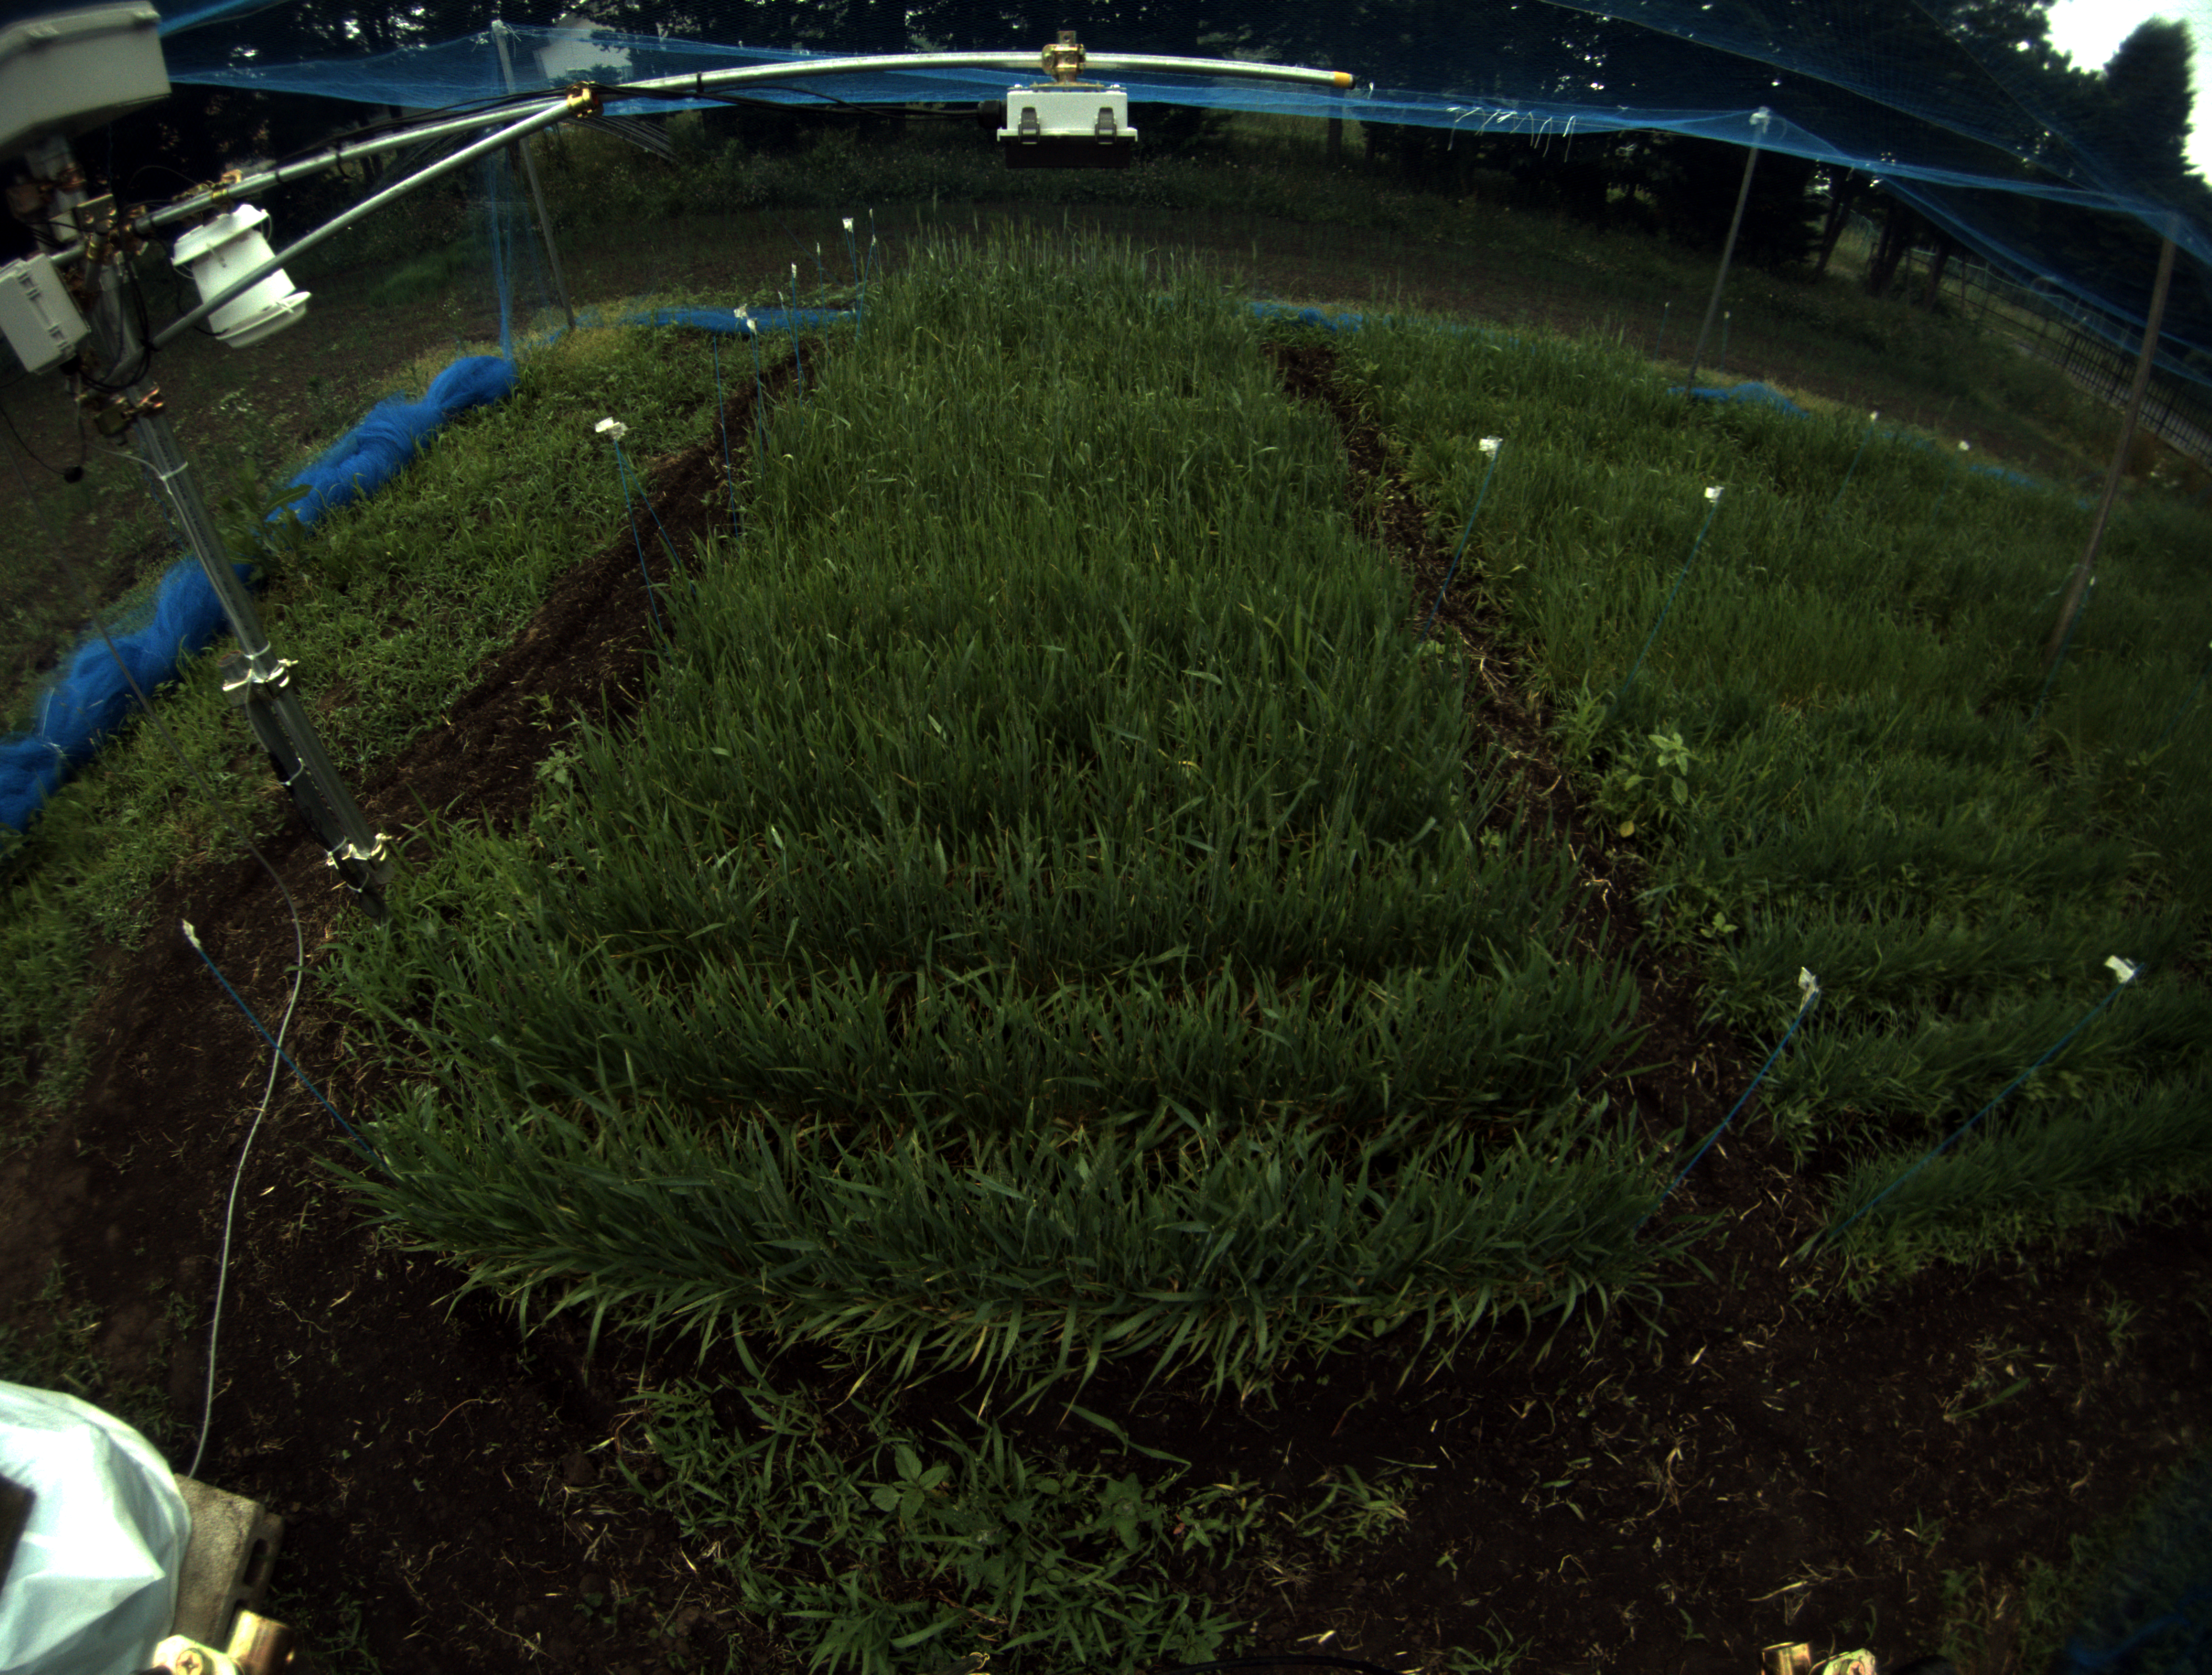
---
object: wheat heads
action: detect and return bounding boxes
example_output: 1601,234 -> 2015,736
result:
1373,700 -> 1383,736
1107,295 -> 1115,318
969,435 -> 975,455
1224,826 -> 1234,857
934,532 -> 943,554
1383,589 -> 1388,613
894,813 -> 905,851
1126,395 -> 1133,425
1044,1157 -> 1055,1186
695,1187 -> 708,1205
952,588 -> 968,605
895,1179 -> 900,1202
1178,378 -> 1182,395
1358,676 -> 1368,703
1458,731 -> 1472,757
1030,1133 -> 1049,1173
1199,1177 -> 1207,1202
604,1088 -> 630,1143
1579,1145 -> 1595,1178
1189,626 -> 1197,656
677,817 -> 699,862
1106,1136 -> 1115,1178
1186,300 -> 1191,322
1173,365 -> 1177,391
912,1172 -> 930,1209
912,679 -> 921,722
1301,470 -> 1320,483
1320,599 -> 1330,638
1245,1183 -> 1259,1203
1062,1219 -> 1074,1236
823,613 -> 830,634
1110,884 -> 1114,895
951,402 -> 957,422
1206,382 -> 1214,410
1259,1213 -> 1282,1232
1136,1060 -> 1147,1075
957,342 -> 964,367
1189,323 -> 1193,348
955,721 -> 960,743
1266,1106 -> 1287,1156
639,781 -> 653,823
1473,1216 -> 1490,1253
1004,648 -> 1011,671
994,1151 -> 1015,1187
991,1214 -> 1000,1230
897,861 -> 905,895
1279,1005 -> 1286,1026
934,456 -> 937,473
1234,762 -> 1242,811
1227,693 -> 1244,733
1346,549 -> 1350,576
898,676 -> 910,718
1085,1147 -> 1106,1185
592,885 -> 603,899
1023,811 -> 1030,852
565,985 -> 577,1002
1335,821 -> 1345,853
849,378 -> 855,406
770,1177 -> 789,1210
1247,646 -> 1254,674
927,1151 -> 934,1184
1333,620 -> 1347,657
734,634 -> 742,656
750,629 -> 757,657
1559,1099 -> 1587,1119
1330,793 -> 1342,839
1133,409 -> 1140,432
1088,562 -> 1096,580
1521,1172 -> 1538,1205
1204,683 -> 1210,729
943,655 -> 950,676
1157,403 -> 1162,422
1318,734 -> 1326,760
788,720 -> 797,747
1187,394 -> 1195,419
783,501 -> 789,522
1134,818 -> 1144,865
1322,459 -> 1331,485
1424,724 -> 1439,749
727,643 -> 736,661
1350,716 -> 1363,742
684,816 -> 693,860
1134,622 -> 1143,653
1034,564 -> 1040,588
1228,506 -> 1232,525
917,974 -> 926,1000
893,361 -> 899,384
1113,705 -> 1119,724
760,572 -> 768,611
715,821 -> 723,834
1109,1041 -> 1115,1061
1203,1120 -> 1228,1135
1340,561 -> 1347,588
739,623 -> 749,647
1234,324 -> 1238,338
1012,696 -> 1025,740
946,672 -> 951,709
914,859 -> 923,888
818,1239 -> 834,1259
1241,819 -> 1253,851
1248,893 -> 1256,912
1393,700 -> 1411,741
515,1068 -> 528,1093
1116,414 -> 1122,432
427,921 -> 439,941
1406,978 -> 1416,1013
675,1135 -> 689,1165
994,815 -> 1004,857
1327,656 -> 1341,697
1007,1207 -> 1015,1224
1221,794 -> 1228,834
1227,1171 -> 1239,1197
1381,717 -> 1399,747
1125,674 -> 1134,705
1369,671 -> 1376,698
1256,554 -> 1261,578
764,831 -> 772,845
840,360 -> 844,383
883,824 -> 895,865
1551,370 -> 1559,390
1221,486 -> 1227,505
508,928 -> 512,942
891,293 -> 896,309
1266,786 -> 1273,830
1888,764 -> 1896,774
1026,903 -> 1031,917
818,460 -> 826,474
850,414 -> 859,443
770,593 -> 775,625
515,1139 -> 533,1170
886,656 -> 896,684
1556,1172 -> 1577,1198
1209,806 -> 1215,831
851,366 -> 858,386
885,888 -> 892,910
621,1153 -> 634,1185
1146,395 -> 1149,408
1341,1298 -> 1360,1306
886,780 -> 894,823
1208,1111 -> 1218,1150
1250,697 -> 1257,717
647,1147 -> 674,1176
679,853 -> 686,877
1216,835 -> 1224,867
958,1196 -> 965,1212
721,886 -> 735,912
706,1156 -> 722,1187
886,298 -> 891,313
929,440 -> 937,465
1120,411 -> 1127,425
976,503 -> 982,518
552,824 -> 566,855
1006,569 -> 1017,599
1192,360 -> 1198,383
596,784 -> 609,806
1232,1210 -> 1246,1227
858,1200 -> 870,1219
1096,1240 -> 1101,1261
1212,613 -> 1225,653
1054,361 -> 1062,376
1121,571 -> 1129,592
